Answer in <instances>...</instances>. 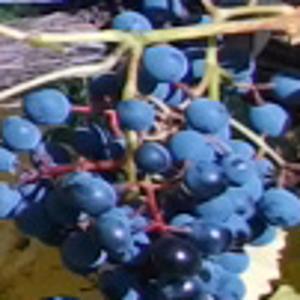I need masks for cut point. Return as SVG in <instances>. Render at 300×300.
<instances>
[{
  "label": "cut point",
  "mask_w": 300,
  "mask_h": 300,
  "mask_svg": "<svg viewBox=\"0 0 300 300\" xmlns=\"http://www.w3.org/2000/svg\"><path fill=\"white\" fill-rule=\"evenodd\" d=\"M207 41V75L201 81L199 91L204 93L209 85L210 98L212 100H220L221 93V77L218 72V37L214 32L206 35Z\"/></svg>",
  "instance_id": "obj_2"
},
{
  "label": "cut point",
  "mask_w": 300,
  "mask_h": 300,
  "mask_svg": "<svg viewBox=\"0 0 300 300\" xmlns=\"http://www.w3.org/2000/svg\"><path fill=\"white\" fill-rule=\"evenodd\" d=\"M296 10L286 2H256L232 4L217 8L211 15L210 23L219 26L224 18L236 15L260 14V13H281L284 15Z\"/></svg>",
  "instance_id": "obj_1"
},
{
  "label": "cut point",
  "mask_w": 300,
  "mask_h": 300,
  "mask_svg": "<svg viewBox=\"0 0 300 300\" xmlns=\"http://www.w3.org/2000/svg\"><path fill=\"white\" fill-rule=\"evenodd\" d=\"M143 71V42L135 39L132 42V67L127 77L126 93L134 96L138 90V82Z\"/></svg>",
  "instance_id": "obj_3"
}]
</instances>
